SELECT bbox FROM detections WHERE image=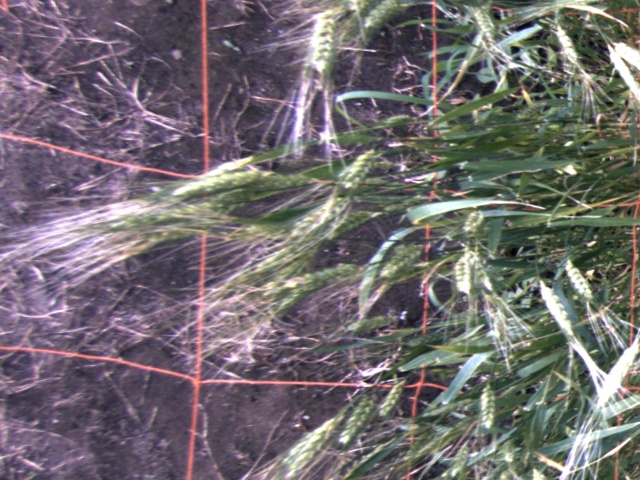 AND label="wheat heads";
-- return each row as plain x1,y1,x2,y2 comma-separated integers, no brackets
450,446,468,475
565,261,593,300
541,284,573,334
197,154,257,182
122,201,206,226
363,0,392,25
465,213,482,238
481,384,496,425
474,12,499,42
614,40,640,74
344,154,375,189
289,421,335,470
260,173,312,187
308,11,332,72
171,169,260,195
247,226,282,242
607,50,632,87
378,381,406,414
453,258,472,291
347,316,397,335
291,213,323,238
554,26,577,62
266,263,357,298
424,400,472,421
493,315,509,343
338,395,378,446
332,213,371,239
381,247,423,281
